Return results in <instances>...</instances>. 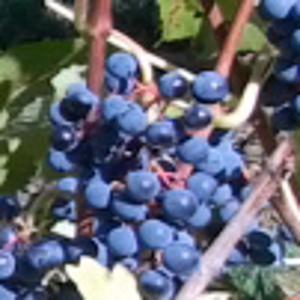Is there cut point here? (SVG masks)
Wrapping results in <instances>:
<instances>
[{"instance_id": "cut-point-1", "label": "cut point", "mask_w": 300, "mask_h": 300, "mask_svg": "<svg viewBox=\"0 0 300 300\" xmlns=\"http://www.w3.org/2000/svg\"><path fill=\"white\" fill-rule=\"evenodd\" d=\"M112 35L121 38L123 41H125L127 45L132 49V51L138 56L142 67L141 69L142 79L146 84H150L152 82V78L154 77V70L152 67L151 59L139 48V46L133 41V39L125 32L114 27V32Z\"/></svg>"}]
</instances>
